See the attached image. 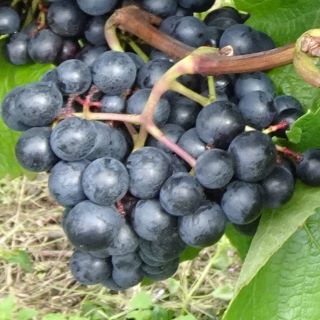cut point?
Here are the masks:
<instances>
[{
  "instance_id": "6a23745f",
  "label": "cut point",
  "mask_w": 320,
  "mask_h": 320,
  "mask_svg": "<svg viewBox=\"0 0 320 320\" xmlns=\"http://www.w3.org/2000/svg\"><path fill=\"white\" fill-rule=\"evenodd\" d=\"M196 67L195 59L187 56L179 60L168 72H166L153 86L144 110L141 115H123V114H110V113H90L91 107H98L99 104L90 102V97L93 93L101 92L95 85L92 86L87 91L84 100L80 98H75L73 100L83 104V113H73L60 115L56 118L53 128L58 126L60 120L69 117H78L85 120H111V121H132L135 125H140L139 135L134 130L132 123L125 122L127 129L131 132L133 136L134 148L133 151L138 148H143L146 137L148 133L155 139L163 143L170 150L181 156L186 160L193 168L190 174L195 176V164L196 159L189 155L186 151L181 149L179 146L170 141L165 137L160 130L152 122L155 113L156 106L160 97L166 90L174 91L176 93L182 94L196 102H198L202 107H205L209 103H213L207 98L201 96L200 94L192 91L191 89L183 86L182 84L175 81L179 76L185 74H192ZM52 128V129H53ZM132 151V152H133Z\"/></svg>"
}]
</instances>
